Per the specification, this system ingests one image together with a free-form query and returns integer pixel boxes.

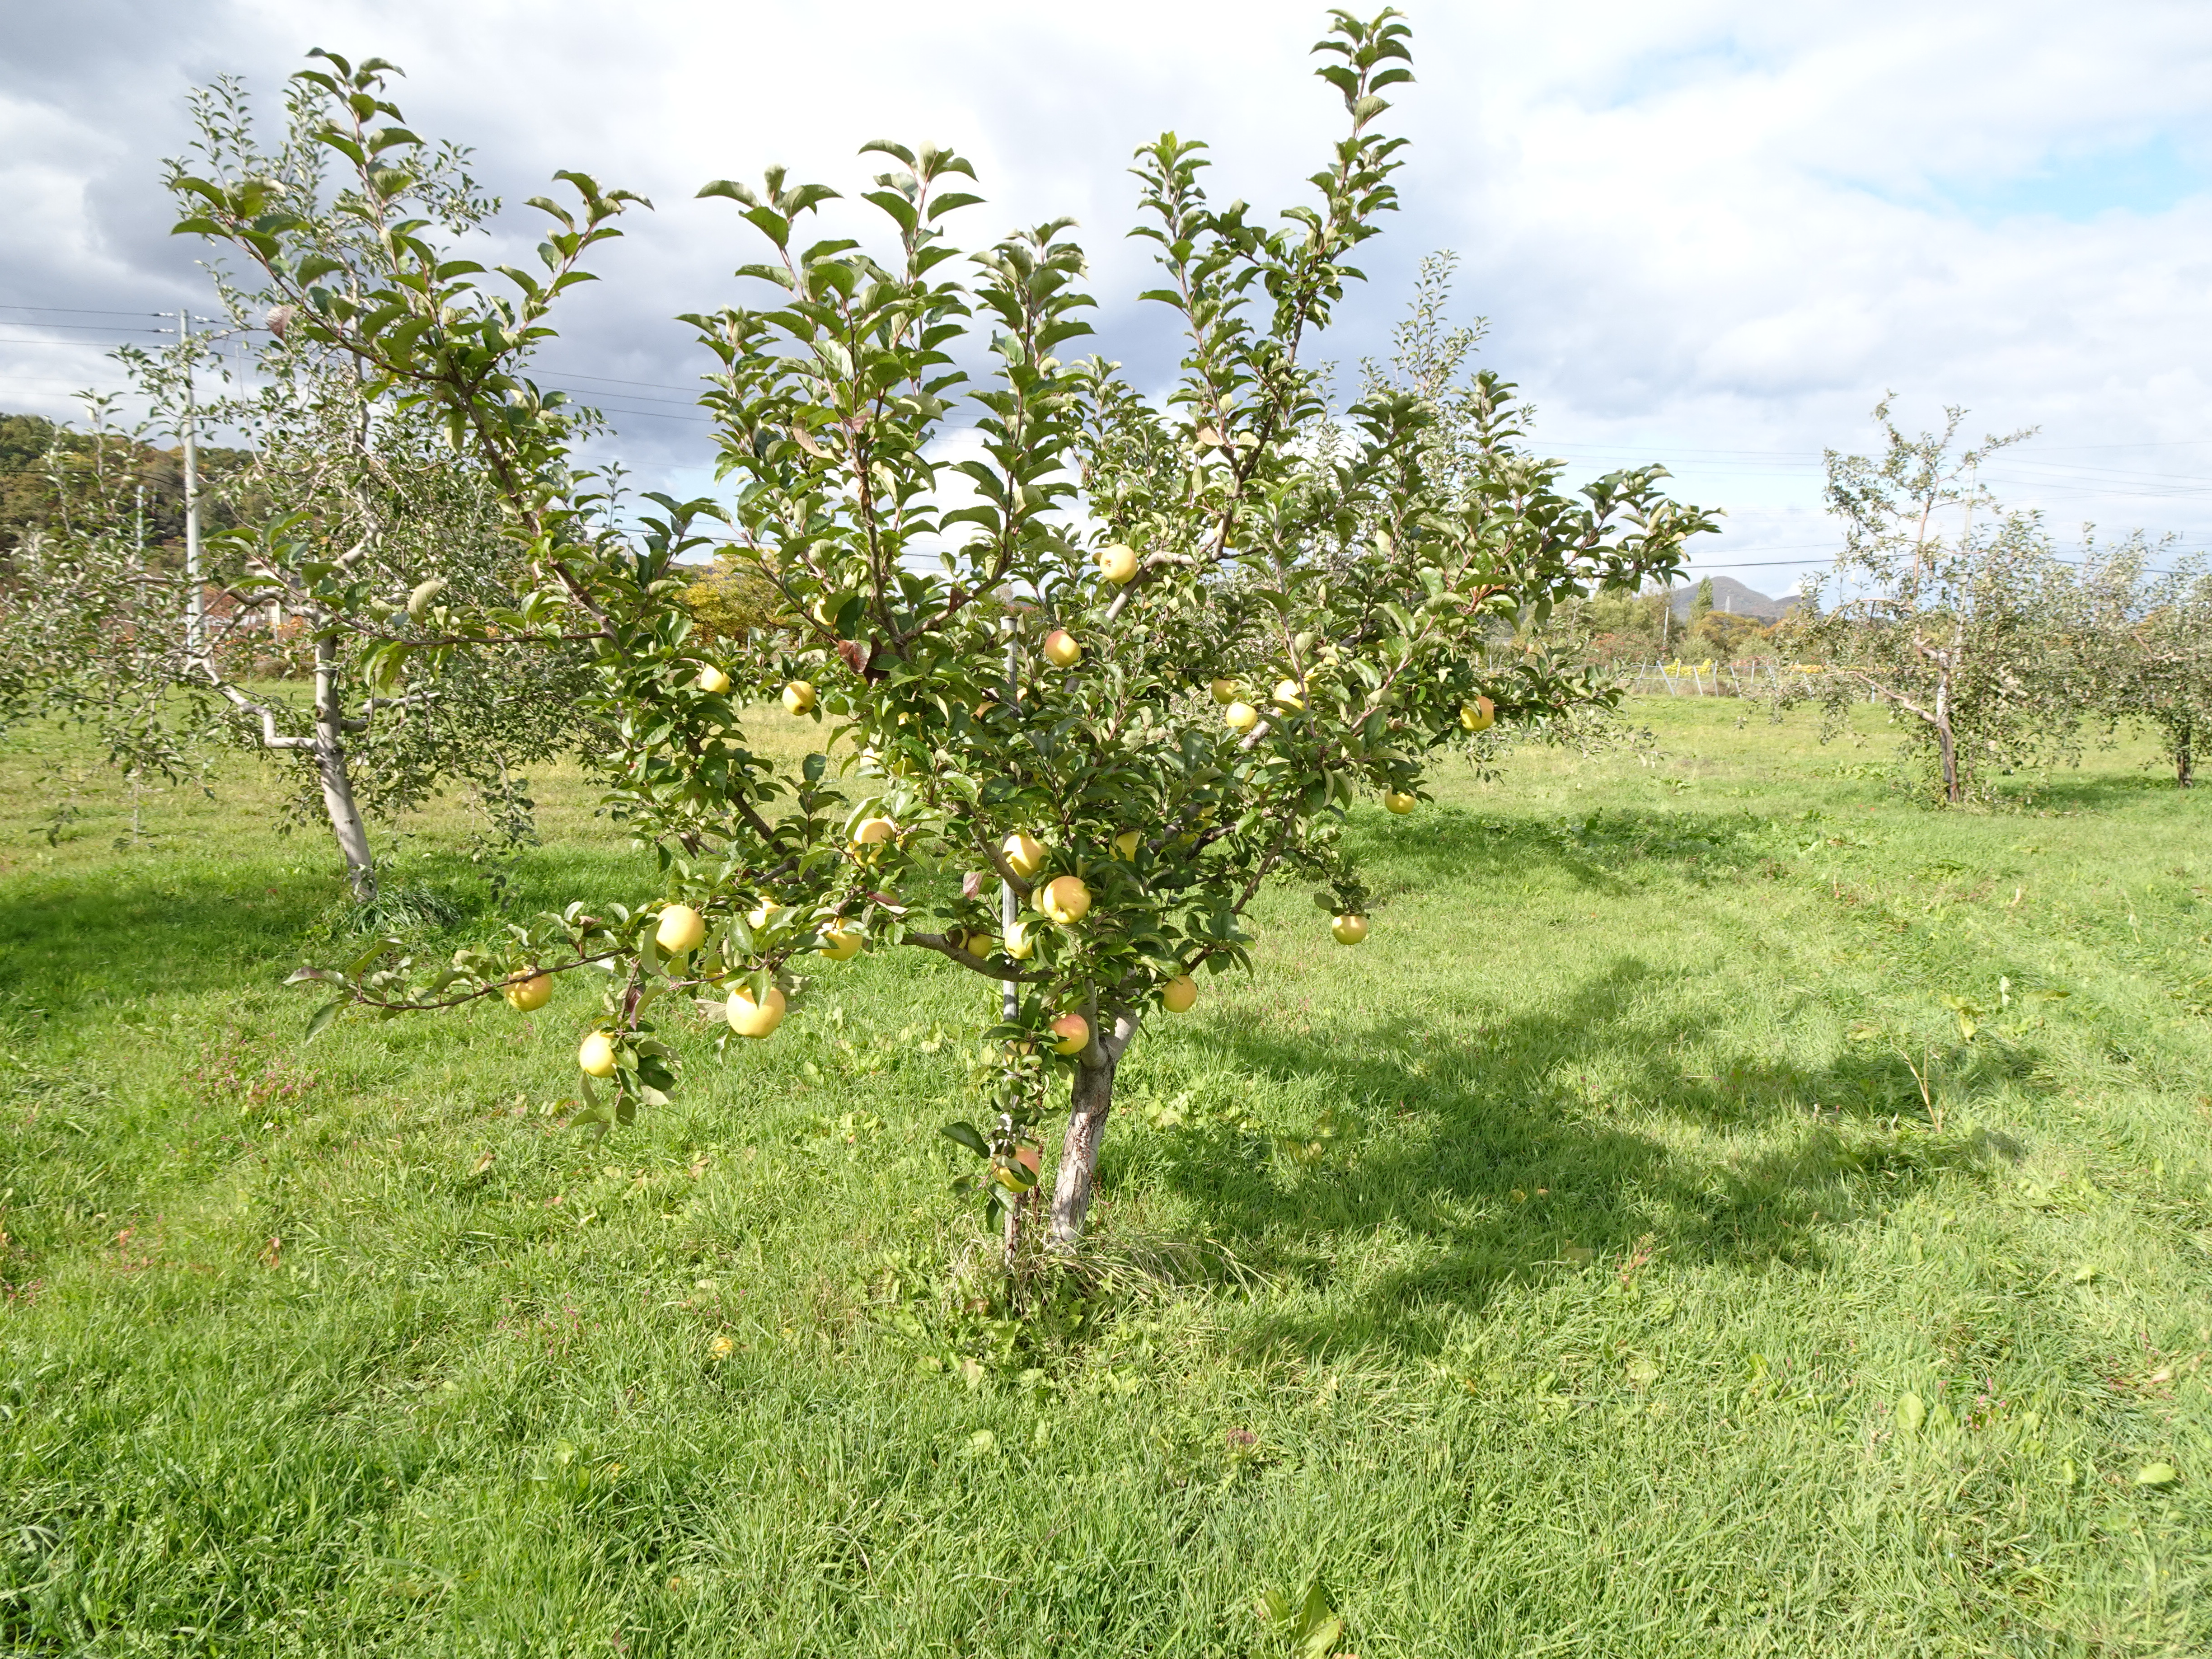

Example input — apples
[1046,627,1083,668]
[849,814,903,865]
[1319,581,1340,603]
[1044,1016,1091,1057]
[1032,992,1063,1016]
[701,949,750,991]
[1176,832,1202,855]
[1272,677,1316,718]
[723,982,787,1040]
[1310,848,1330,867]
[1107,829,1150,875]
[797,642,829,672]
[1116,967,1145,997]
[1302,656,1343,701]
[991,1143,1040,1195]
[968,930,995,959]
[890,821,923,853]
[1458,693,1498,734]
[747,893,792,934]
[1242,765,1268,789]
[812,597,849,631]
[778,675,820,720]
[1004,920,1044,958]
[1028,886,1060,916]
[652,903,706,958]
[1188,804,1218,829]
[1099,543,1140,585]
[577,1030,628,1077]
[1208,670,1247,704]
[999,829,1054,888]
[698,661,737,698]
[1384,780,1416,816]
[816,912,865,963]
[1142,657,1175,687]
[896,711,930,742]
[1014,685,1047,714]
[1041,875,1093,927]
[969,699,1008,734]
[1224,697,1262,736]
[1294,631,1325,662]
[1005,1035,1039,1075]
[1015,759,1055,796]
[1331,911,1368,946]
[858,746,893,780]
[947,697,974,720]
[1157,972,1198,1014]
